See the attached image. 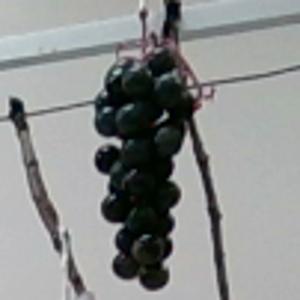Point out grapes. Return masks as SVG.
Here are the masks:
<instances>
[{
	"label": "grapes",
	"instance_id": "obj_1",
	"mask_svg": "<svg viewBox=\"0 0 300 300\" xmlns=\"http://www.w3.org/2000/svg\"><path fill=\"white\" fill-rule=\"evenodd\" d=\"M169 45L148 48L145 60L127 55L113 63L94 98L97 134L124 142L99 147L98 173L109 176L108 194L100 204L106 221L123 226L114 238L119 255L112 263L116 277L161 290L171 273L164 261L173 251L169 235L176 219L181 189L169 179L193 115L196 99L187 77L176 66Z\"/></svg>",
	"mask_w": 300,
	"mask_h": 300
}]
</instances>
